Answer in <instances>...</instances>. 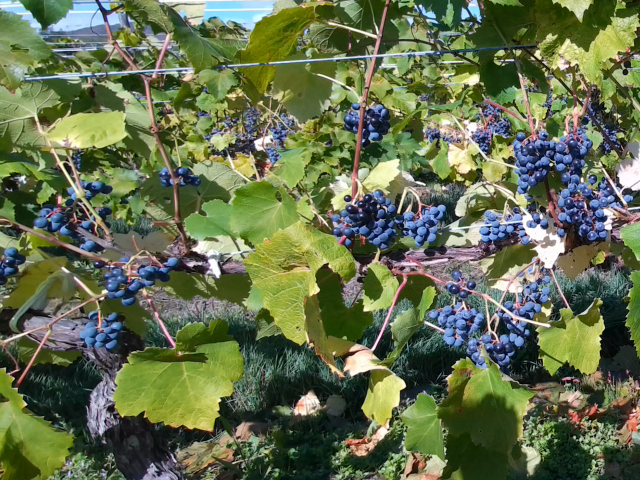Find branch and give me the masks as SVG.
I'll use <instances>...</instances> for the list:
<instances>
[{
	"label": "branch",
	"mask_w": 640,
	"mask_h": 480,
	"mask_svg": "<svg viewBox=\"0 0 640 480\" xmlns=\"http://www.w3.org/2000/svg\"><path fill=\"white\" fill-rule=\"evenodd\" d=\"M376 65V59L372 58L370 65H369V69H368V73L366 76V80H365V85L363 86V91H362V102H361V108H360V112L358 115V131H357V135H356V139H355V157H354V169H353V174H352V178H351V188H352V192H351V197L355 198L356 194H357V184H356V180L358 177V172H359V160H360V142H361V137H362V133H363V118L365 115V110H366V105H367V94H368V89L370 87V82H371V78L374 72V67Z\"/></svg>",
	"instance_id": "obj_2"
},
{
	"label": "branch",
	"mask_w": 640,
	"mask_h": 480,
	"mask_svg": "<svg viewBox=\"0 0 640 480\" xmlns=\"http://www.w3.org/2000/svg\"><path fill=\"white\" fill-rule=\"evenodd\" d=\"M532 265H534V261H531L530 263H528L527 265H525V267H524V268H522V269L518 270V271H517V272L512 276L511 280L509 281V284L507 285V287H505L504 292H503V294L501 295V297L498 299V301H497L496 299L491 298L490 296L485 295V294H482V293H479V292H476V291H473V290H468V289H466L465 287H463V285H460V289H461L463 292L470 293V294H473V295H477V296H480V297H482V298H485V299H487V300H489V301L493 302L494 304H496V309H499V308H500V310H502V312H504L506 315H508V316H510V317H512V318H515V319H517V320H519V321H522V322H525V323H530V324H534V325L542 326V327H545V328H550V325H547V324H544V323H540V322H536V321H532V320H527V319H525V318L519 317V316H517V315H515V314H513V313H511V312H509V311H507V310H506V309L501 305V302L503 301L504 297L506 296L508 289H510V288H511V286H512V284H513L514 280H515V279H516V278H517V277H518L522 272H525V271H526L530 266H532Z\"/></svg>",
	"instance_id": "obj_6"
},
{
	"label": "branch",
	"mask_w": 640,
	"mask_h": 480,
	"mask_svg": "<svg viewBox=\"0 0 640 480\" xmlns=\"http://www.w3.org/2000/svg\"><path fill=\"white\" fill-rule=\"evenodd\" d=\"M514 64H515L516 74H517V77H518L519 88H520V90L522 92V101H523L524 110H525V113L527 115L528 127H529V135L533 136L534 133H535V128H534V124H533V117H532V112L530 110L528 99H527V90H526V87L524 85L523 74H522V71H521V66H520L519 60L515 59L514 60Z\"/></svg>",
	"instance_id": "obj_7"
},
{
	"label": "branch",
	"mask_w": 640,
	"mask_h": 480,
	"mask_svg": "<svg viewBox=\"0 0 640 480\" xmlns=\"http://www.w3.org/2000/svg\"><path fill=\"white\" fill-rule=\"evenodd\" d=\"M107 294L106 293H100L99 295L93 296L91 298H88L82 302H80L79 304H77L76 306H73L69 309H66L65 311H63L62 313H60L58 316H56L51 322H49L48 324L39 326L38 328L32 329L31 331L13 336L11 338H9L8 340H1L0 344L1 345H10L13 342H16L18 340L33 336L37 333H40L41 331L50 329L52 327H54L61 319H63L65 316H67L68 314H71L73 312L78 311L79 309L83 308L84 306L93 303L95 301H99L103 298H106Z\"/></svg>",
	"instance_id": "obj_4"
},
{
	"label": "branch",
	"mask_w": 640,
	"mask_h": 480,
	"mask_svg": "<svg viewBox=\"0 0 640 480\" xmlns=\"http://www.w3.org/2000/svg\"><path fill=\"white\" fill-rule=\"evenodd\" d=\"M390 7V0H385V5L382 11L381 20L379 22L378 30L376 33V42L373 49V53H378L380 45H381V36L384 29V24L386 22L387 13Z\"/></svg>",
	"instance_id": "obj_10"
},
{
	"label": "branch",
	"mask_w": 640,
	"mask_h": 480,
	"mask_svg": "<svg viewBox=\"0 0 640 480\" xmlns=\"http://www.w3.org/2000/svg\"><path fill=\"white\" fill-rule=\"evenodd\" d=\"M12 225H13L14 227H16L17 229L22 230V231H24V232H27V233H29V234H31V235H33V236H35V237H38V238H41V239H47V240H50L51 242L57 243V244H59L60 246H63V247L69 248V249L74 250V251H78V252H80V253L84 254L85 256H89V257H91V258L98 259V260H100V261L108 262V263H111V264H114V263H115V259H114V258H111V257H105V256H103V255L93 253V252H91V251L86 250L85 248L80 247V246H76V245H73V244H71V243H68V242L62 241L61 239L56 238V237H53L52 235L40 233V232H38V231L33 230V229H32V228H30V227H26V226H24V225L19 224V223H18V222H16V221H13V222H12Z\"/></svg>",
	"instance_id": "obj_5"
},
{
	"label": "branch",
	"mask_w": 640,
	"mask_h": 480,
	"mask_svg": "<svg viewBox=\"0 0 640 480\" xmlns=\"http://www.w3.org/2000/svg\"><path fill=\"white\" fill-rule=\"evenodd\" d=\"M100 14H101L103 23L106 25V27L108 29L109 41H110L111 45L115 48L117 53H120L122 55V57L125 60V62H126L128 67H130L131 69H139V67L137 65H135V64H133L131 62V60L128 57L127 53L122 48H120L118 43L115 41L113 27H112L111 23L109 22V20L107 18L105 10L101 9L100 10Z\"/></svg>",
	"instance_id": "obj_8"
},
{
	"label": "branch",
	"mask_w": 640,
	"mask_h": 480,
	"mask_svg": "<svg viewBox=\"0 0 640 480\" xmlns=\"http://www.w3.org/2000/svg\"><path fill=\"white\" fill-rule=\"evenodd\" d=\"M543 185H544V194L546 195V203L548 208L550 209V215L554 221V223L556 225H558L560 228H563L564 223L562 221L559 220L556 212H555V206L552 204V200H551V193L549 192V183H548V177L544 176L543 177Z\"/></svg>",
	"instance_id": "obj_9"
},
{
	"label": "branch",
	"mask_w": 640,
	"mask_h": 480,
	"mask_svg": "<svg viewBox=\"0 0 640 480\" xmlns=\"http://www.w3.org/2000/svg\"><path fill=\"white\" fill-rule=\"evenodd\" d=\"M393 273L395 275H399V276H422V277H427L433 281H435L436 283H439L441 285L445 284V281L441 278H439L438 276L431 274L429 272H424V271H402V270H393Z\"/></svg>",
	"instance_id": "obj_11"
},
{
	"label": "branch",
	"mask_w": 640,
	"mask_h": 480,
	"mask_svg": "<svg viewBox=\"0 0 640 480\" xmlns=\"http://www.w3.org/2000/svg\"><path fill=\"white\" fill-rule=\"evenodd\" d=\"M139 78L141 79V81L143 83V88L145 90V98H146V102H147V106H148V112H149V115H150L151 124H152V127H153V135H154L155 141L157 143L158 150L161 153V158L165 161L166 166L168 168V171L170 173L171 179L173 180V185L171 186V190H172L173 196L175 197V203H174L175 223L179 228L180 236L182 238V243L186 244L187 243V236L185 234L184 225L180 221V216H179L180 191H179V187H178V182L176 181V174H175L174 168H173V166L171 164L170 158L166 155V149L163 148L162 141H161L160 136H159L158 125H157V122H156V116H155V112H154V109H153V104H152V100H151V96H150V87L148 85V81H147L146 76L144 74H140Z\"/></svg>",
	"instance_id": "obj_1"
},
{
	"label": "branch",
	"mask_w": 640,
	"mask_h": 480,
	"mask_svg": "<svg viewBox=\"0 0 640 480\" xmlns=\"http://www.w3.org/2000/svg\"><path fill=\"white\" fill-rule=\"evenodd\" d=\"M42 141L47 145L49 151L52 154V157L56 160L61 172L63 173V176L65 177V180L67 181L68 185L70 186V188L74 191V193L76 194L77 198L80 200L81 204L84 206V208L88 211V213L91 215V217L98 222L103 235L105 237L106 240L112 241V237L110 236L108 229L106 228V225L104 224L103 220L95 213V211L91 208V206L89 205V203L85 200V198L82 196L81 192L79 191L78 187L75 185V183L72 181L66 167L64 166L61 158L59 157V155L57 154L56 150L54 149L52 143L50 142V140L47 137H43Z\"/></svg>",
	"instance_id": "obj_3"
}]
</instances>
